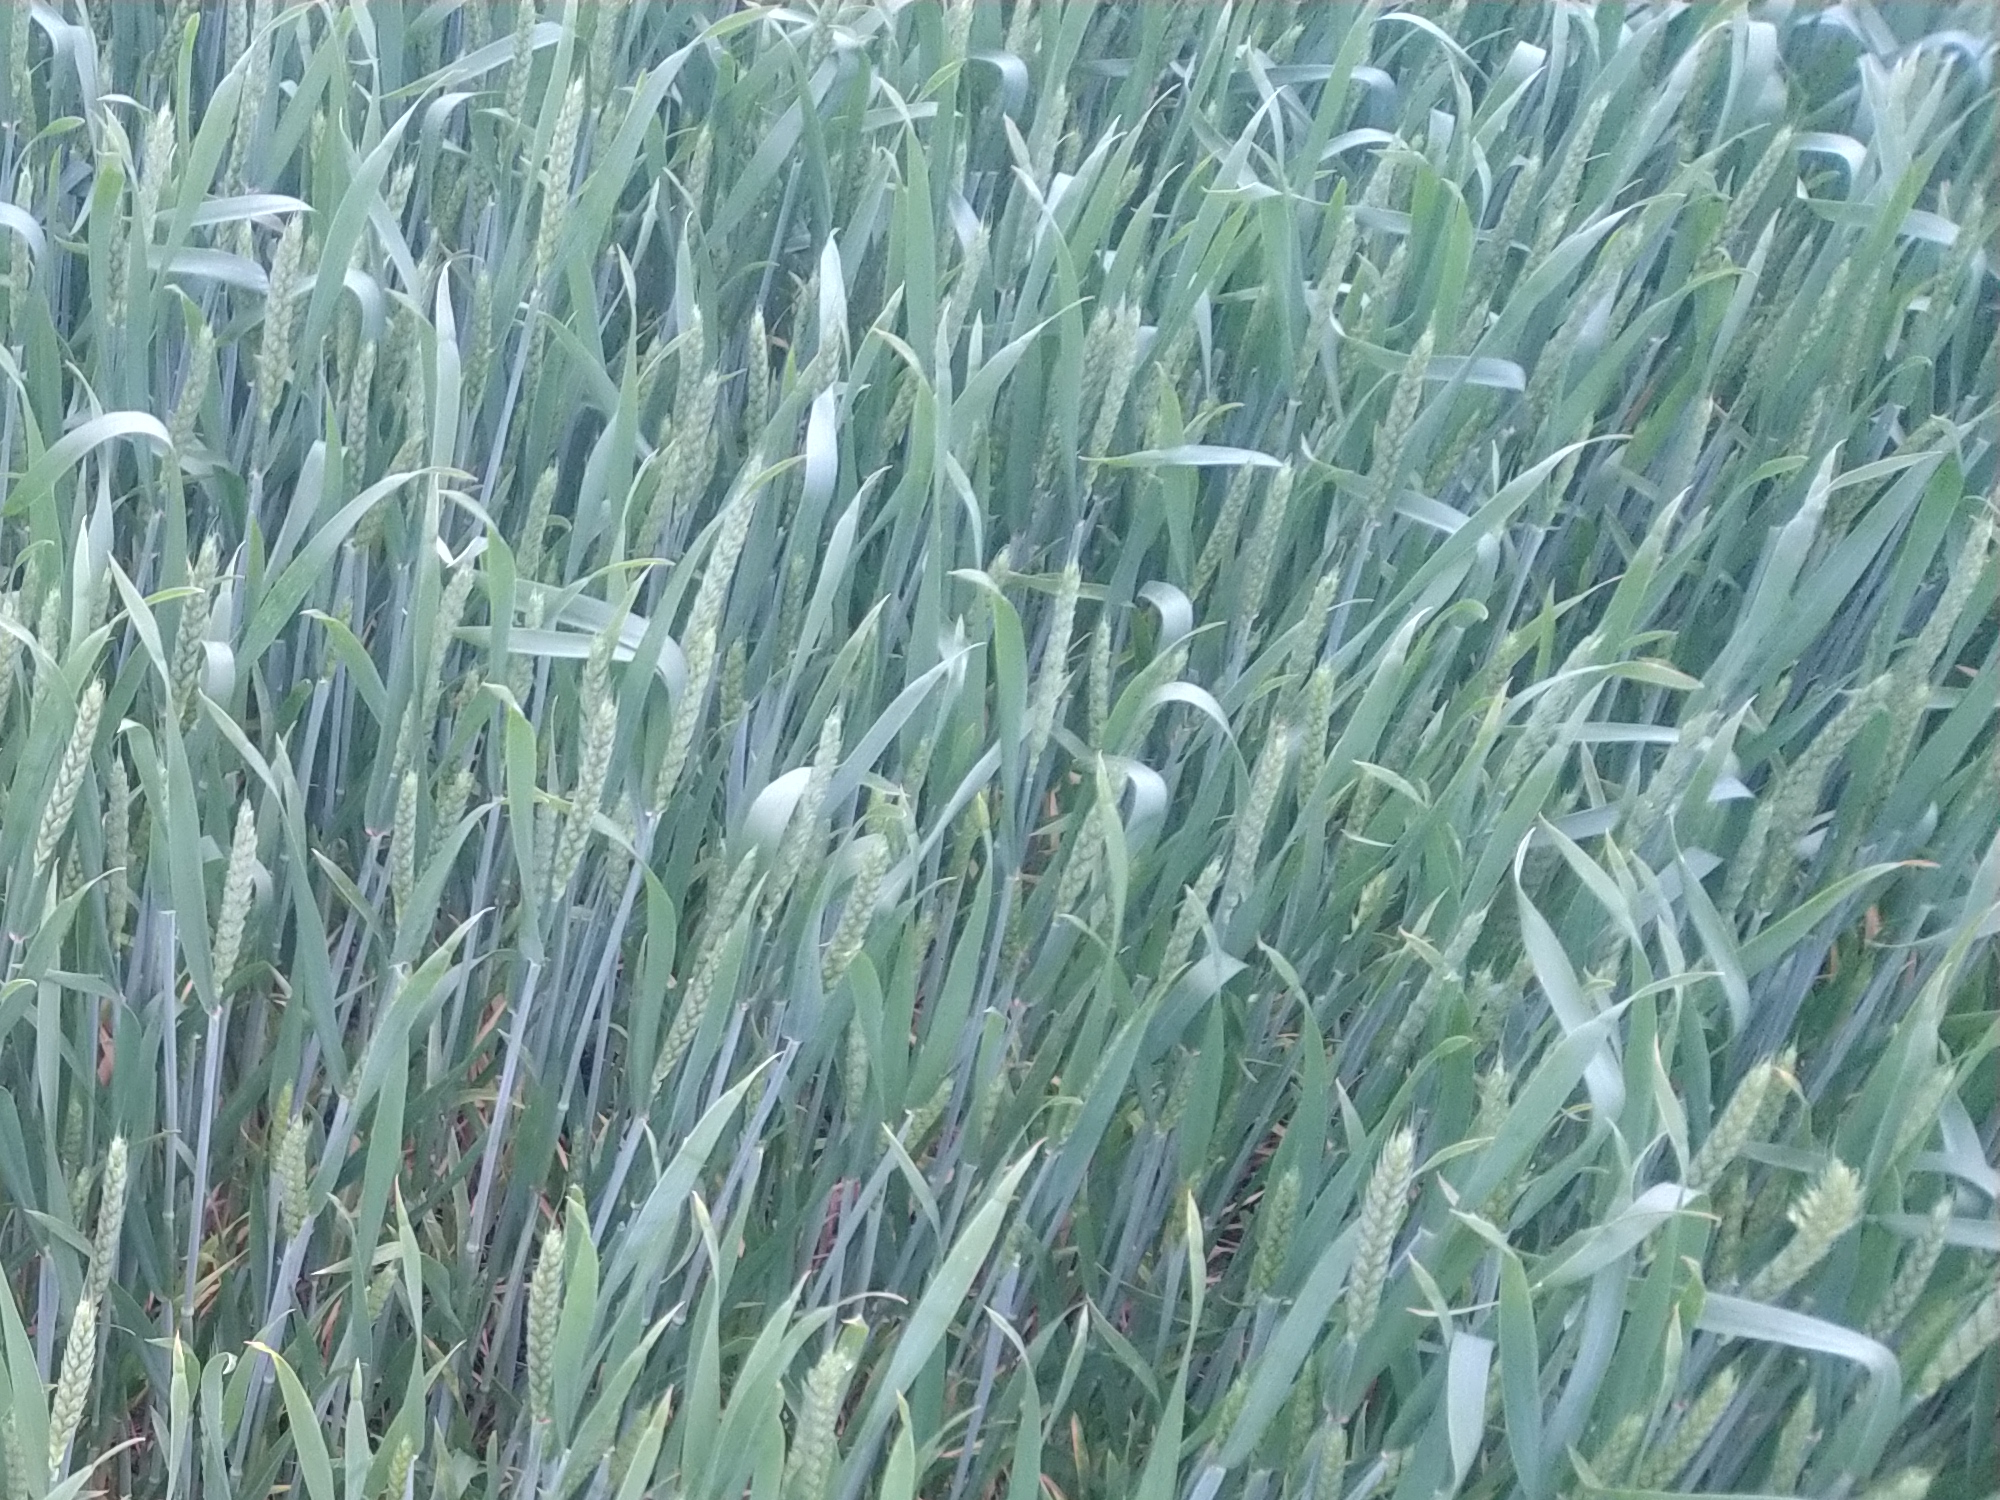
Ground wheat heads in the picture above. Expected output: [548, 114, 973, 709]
[1041, 357, 1060, 431]
[1471, 1072, 1507, 1231]
[578, 636, 611, 750]
[1257, 1172, 1301, 1289]
[949, 2, 973, 66]
[392, 772, 418, 921]
[1892, 1226, 1996, 1352]
[500, 1, 536, 153]
[1373, 1447, 1415, 1494]
[310, 113, 325, 203]
[1371, 693, 1435, 810]
[1208, 1091, 1242, 1159]
[1709, 1176, 1747, 1287]
[1745, 1174, 1789, 1242]
[722, 639, 746, 728]
[1676, 33, 1725, 142]
[980, 1074, 1006, 1141]
[1781, 389, 1825, 481]
[1714, 1168, 1865, 1343]
[260, 221, 302, 410]
[129, 802, 153, 886]
[782, 453, 806, 526]
[1160, 862, 1223, 984]
[1888, 1070, 1956, 1162]
[1914, 1297, 2000, 1398]
[674, 308, 704, 432]
[1186, 400, 1214, 444]
[422, 772, 474, 874]
[387, 164, 415, 218]
[435, 142, 457, 218]
[1501, 640, 1599, 792]
[819, 327, 841, 392]
[608, 794, 635, 903]
[611, 1405, 651, 1484]
[684, 128, 711, 250]
[904, 1080, 955, 1149]
[1122, 653, 1188, 754]
[367, 1266, 397, 1321]
[1761, 786, 1821, 905]
[1056, 775, 1124, 914]
[882, 370, 919, 445]
[1334, 771, 1376, 870]
[1007, 0, 1030, 53]
[1390, 141, 1422, 210]
[33, 589, 61, 709]
[1932, 194, 1985, 305]
[63, 1097, 83, 1176]
[1170, 330, 1196, 387]
[1347, 1131, 1416, 1335]
[516, 468, 559, 578]
[344, 972, 410, 1093]
[1719, 803, 1772, 915]
[758, 716, 845, 915]
[435, 673, 480, 808]
[283, 1121, 310, 1238]
[744, 1067, 767, 1128]
[60, 828, 84, 899]
[0, 601, 18, 762]
[509, 596, 545, 702]
[420, 2, 441, 79]
[655, 632, 716, 807]
[1525, 227, 1643, 403]
[1336, 73, 1368, 136]
[107, 758, 128, 933]
[1042, 310, 1112, 481]
[1088, 620, 1111, 747]
[1685, 1066, 1774, 1188]
[1354, 875, 1389, 930]
[109, 206, 128, 313]
[270, 1082, 294, 1169]
[1790, 260, 1851, 368]
[777, 557, 806, 664]
[676, 376, 719, 517]
[1418, 2, 1469, 83]
[990, 387, 1016, 494]
[420, 567, 475, 732]
[1369, 330, 1435, 509]
[233, 221, 257, 260]
[946, 229, 990, 350]
[1179, 375, 1202, 423]
[1636, 1370, 1737, 1488]
[378, 310, 414, 399]
[1134, 327, 1181, 436]
[1527, 100, 1609, 278]
[1030, 564, 1082, 747]
[252, 1, 274, 96]
[846, 137, 874, 217]
[1064, 1018, 1133, 1136]
[592, 104, 618, 170]
[1360, 149, 1399, 226]
[1313, 1428, 1346, 1500]
[1869, 689, 1928, 807]
[212, 800, 258, 992]
[1299, 667, 1333, 806]
[569, 1126, 587, 1205]
[1539, 360, 1567, 414]
[1861, 1469, 1929, 1500]
[785, 824, 832, 926]
[224, 83, 258, 194]
[708, 819, 723, 915]
[1191, 465, 1254, 594]
[168, 328, 215, 451]
[1825, 423, 1932, 538]
[1139, 413, 1163, 491]
[1763, 238, 1813, 331]
[1461, 161, 1539, 318]
[533, 796, 556, 907]
[1084, 305, 1142, 484]
[9, 174, 31, 324]
[1111, 167, 1142, 215]
[71, 1169, 91, 1227]
[36, 680, 104, 865]
[1270, 26, 1303, 64]
[1063, 106, 1083, 172]
[821, 843, 890, 993]
[355, 438, 422, 542]
[391, 698, 417, 775]
[1156, 2, 1210, 70]
[1239, 467, 1294, 619]
[168, 539, 219, 718]
[946, 801, 978, 905]
[1221, 728, 1289, 915]
[695, 429, 722, 506]
[404, 342, 426, 516]
[1081, 299, 1129, 441]
[1293, 216, 1357, 386]
[49, 1302, 97, 1474]
[800, 1355, 848, 1500]
[1763, 1391, 1815, 1500]
[529, 1230, 565, 1415]
[1965, 327, 2000, 405]
[466, 274, 493, 401]
[1474, 960, 1535, 1052]
[90, 569, 113, 631]
[637, 339, 661, 418]
[10, 0, 29, 97]
[904, 737, 932, 802]
[153, 1, 210, 72]
[1230, 287, 1270, 385]
[1000, 875, 1024, 980]
[912, 911, 935, 974]
[19, 71, 37, 143]
[1548, 414, 1594, 509]
[1518, 216, 1567, 286]
[1009, 91, 1066, 273]
[1777, 676, 1893, 788]
[1384, 913, 1486, 1062]
[590, 1, 621, 105]
[967, 551, 1011, 633]
[471, 141, 493, 220]
[1617, 726, 1702, 856]
[462, 1, 481, 89]
[475, 1, 493, 49]
[522, 300, 545, 403]
[344, 343, 375, 499]
[19, 559, 41, 628]
[89, 1137, 130, 1300]
[1633, 23, 1666, 104]
[1930, 744, 1999, 848]
[1864, 1198, 1954, 1336]
[1899, 526, 1993, 690]
[1426, 410, 1483, 492]
[1273, 577, 1338, 721]
[633, 452, 680, 568]
[3, 1413, 27, 1500]
[1472, 636, 1521, 732]
[1838, 267, 1882, 384]
[138, 108, 175, 233]
[336, 235, 366, 393]
[792, 275, 811, 366]
[1736, 842, 1775, 924]
[1169, 1174, 1200, 1242]
[550, 701, 618, 895]
[687, 851, 760, 997]
[1215, 1378, 1249, 1445]
[650, 882, 750, 1089]
[847, 1016, 867, 1119]
[158, 765, 170, 826]
[1454, 301, 1490, 354]
[498, 404, 526, 490]
[1749, 1052, 1795, 1143]
[1610, 284, 1643, 333]
[1694, 130, 1792, 270]
[1734, 312, 1785, 419]
[940, 144, 967, 268]
[323, 598, 352, 675]
[388, 1437, 413, 1500]
[685, 494, 756, 662]
[1158, 1053, 1201, 1129]
[1712, 315, 1765, 394]
[212, 184, 242, 251]
[809, 1, 844, 72]
[441, 168, 471, 238]
[1545, 1418, 1645, 1500]
[1340, 247, 1406, 375]
[1288, 1359, 1316, 1469]
[746, 313, 770, 452]
[226, 1, 248, 71]
[538, 78, 587, 269]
